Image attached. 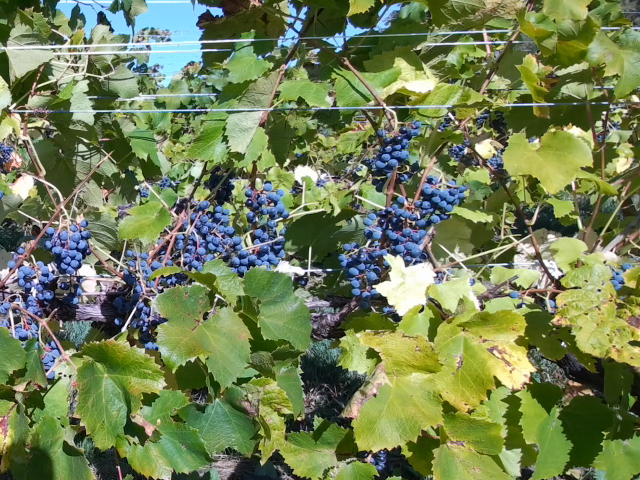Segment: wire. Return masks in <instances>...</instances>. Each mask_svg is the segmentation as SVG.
Here are the masks:
<instances>
[{"label":"wire","instance_id":"obj_1","mask_svg":"<svg viewBox=\"0 0 640 480\" xmlns=\"http://www.w3.org/2000/svg\"><path fill=\"white\" fill-rule=\"evenodd\" d=\"M516 29L503 30H450V31H416L406 33H363L344 36L327 35H294L283 37H259L251 39L230 38H204L187 42L178 41H132L121 44L86 43L79 45H40V46H2V51H42V50H81L88 48L102 49H123L132 46H176L189 47L206 43H239L253 44L261 42H285L296 40H325V41H346L365 38H408L418 36H452V35H505L516 34Z\"/></svg>","mask_w":640,"mask_h":480},{"label":"wire","instance_id":"obj_2","mask_svg":"<svg viewBox=\"0 0 640 480\" xmlns=\"http://www.w3.org/2000/svg\"><path fill=\"white\" fill-rule=\"evenodd\" d=\"M352 111V110H375L385 111L386 106L377 105H351V106H331V105H312V106H275V107H231V106H212L201 108L186 109H104V110H64V109H8V114L22 115H38V114H62V115H106V114H188L203 113L214 111L225 112H278V111Z\"/></svg>","mask_w":640,"mask_h":480},{"label":"wire","instance_id":"obj_3","mask_svg":"<svg viewBox=\"0 0 640 480\" xmlns=\"http://www.w3.org/2000/svg\"><path fill=\"white\" fill-rule=\"evenodd\" d=\"M230 48H206V49H195V50H186V49H156V50H133V51H122V50H98V51H53V56H83V57H92V56H100V55H120V56H135V55H159V54H184V55H197V54H208V53H230Z\"/></svg>","mask_w":640,"mask_h":480},{"label":"wire","instance_id":"obj_4","mask_svg":"<svg viewBox=\"0 0 640 480\" xmlns=\"http://www.w3.org/2000/svg\"><path fill=\"white\" fill-rule=\"evenodd\" d=\"M490 44H507L506 39H487V40H458V41H448L445 43H437V42H428V47L435 48H447L450 46H461V45H490Z\"/></svg>","mask_w":640,"mask_h":480},{"label":"wire","instance_id":"obj_5","mask_svg":"<svg viewBox=\"0 0 640 480\" xmlns=\"http://www.w3.org/2000/svg\"><path fill=\"white\" fill-rule=\"evenodd\" d=\"M526 106H544V107H577V106H582V107H585L586 103L584 101H575V102L524 101V102H507L505 104L506 108H509V107H526Z\"/></svg>","mask_w":640,"mask_h":480},{"label":"wire","instance_id":"obj_6","mask_svg":"<svg viewBox=\"0 0 640 480\" xmlns=\"http://www.w3.org/2000/svg\"><path fill=\"white\" fill-rule=\"evenodd\" d=\"M539 266V261H514V262H486V263H467V268H488V267H516V266Z\"/></svg>","mask_w":640,"mask_h":480},{"label":"wire","instance_id":"obj_7","mask_svg":"<svg viewBox=\"0 0 640 480\" xmlns=\"http://www.w3.org/2000/svg\"><path fill=\"white\" fill-rule=\"evenodd\" d=\"M617 104L637 106V105H640V100L630 101V100H624V99H615V100H608V101H590L589 102L590 106H610V105H617Z\"/></svg>","mask_w":640,"mask_h":480}]
</instances>
